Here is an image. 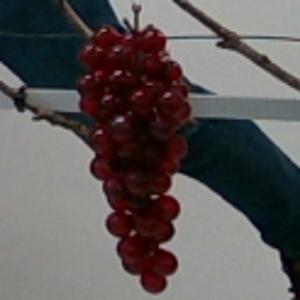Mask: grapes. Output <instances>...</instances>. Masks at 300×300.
<instances>
[{
	"instance_id": "obj_1",
	"label": "grapes",
	"mask_w": 300,
	"mask_h": 300,
	"mask_svg": "<svg viewBox=\"0 0 300 300\" xmlns=\"http://www.w3.org/2000/svg\"><path fill=\"white\" fill-rule=\"evenodd\" d=\"M158 27L142 37L109 25L80 49L82 69L74 84L95 156L93 178L114 211L107 214L108 234L121 238L115 253L125 273L138 276L152 296L166 292L179 260L159 248L172 240L181 205L169 193L179 161L190 151L188 140L198 124L188 101L191 85L180 61L165 48Z\"/></svg>"
}]
</instances>
